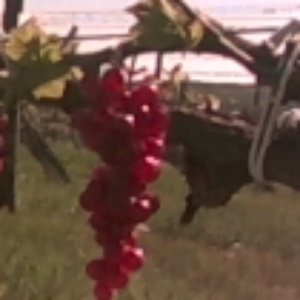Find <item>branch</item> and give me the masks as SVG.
Here are the masks:
<instances>
[{"mask_svg":"<svg viewBox=\"0 0 300 300\" xmlns=\"http://www.w3.org/2000/svg\"><path fill=\"white\" fill-rule=\"evenodd\" d=\"M175 5L185 11L190 17L195 19L203 28L202 40L194 49H173L167 47L158 48H133V40H126L112 45L109 48L87 55H70L68 62L71 65L93 66L97 63L112 62L122 60L133 53L141 54L145 51H196V52H214L223 54L225 57H231L247 67L253 74H257L255 57L243 47L235 38L219 28L216 24L207 22L197 12L190 8L182 0H176Z\"/></svg>","mask_w":300,"mask_h":300,"instance_id":"30e6481e","label":"branch"}]
</instances>
